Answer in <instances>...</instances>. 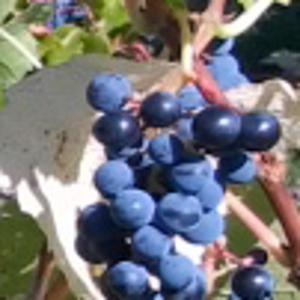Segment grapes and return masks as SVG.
<instances>
[{
	"label": "grapes",
	"mask_w": 300,
	"mask_h": 300,
	"mask_svg": "<svg viewBox=\"0 0 300 300\" xmlns=\"http://www.w3.org/2000/svg\"><path fill=\"white\" fill-rule=\"evenodd\" d=\"M236 41L215 37L208 46L206 64L216 88L225 93L238 83H252L250 75L243 73V65L239 57L233 54Z\"/></svg>",
	"instance_id": "0513c4c2"
},
{
	"label": "grapes",
	"mask_w": 300,
	"mask_h": 300,
	"mask_svg": "<svg viewBox=\"0 0 300 300\" xmlns=\"http://www.w3.org/2000/svg\"><path fill=\"white\" fill-rule=\"evenodd\" d=\"M86 100L105 114L92 124L108 160L93 185L108 207L95 201L79 210L77 256L106 265L108 300H204L207 273L176 252V241L202 247L221 235L228 185L254 181L251 152L280 143L279 119L212 104L193 87L143 98L120 72L92 75Z\"/></svg>",
	"instance_id": "01657485"
},
{
	"label": "grapes",
	"mask_w": 300,
	"mask_h": 300,
	"mask_svg": "<svg viewBox=\"0 0 300 300\" xmlns=\"http://www.w3.org/2000/svg\"><path fill=\"white\" fill-rule=\"evenodd\" d=\"M253 266L236 269L229 281L228 300H271L274 283L267 266L269 257L264 248L254 246L248 252Z\"/></svg>",
	"instance_id": "b958b902"
}]
</instances>
